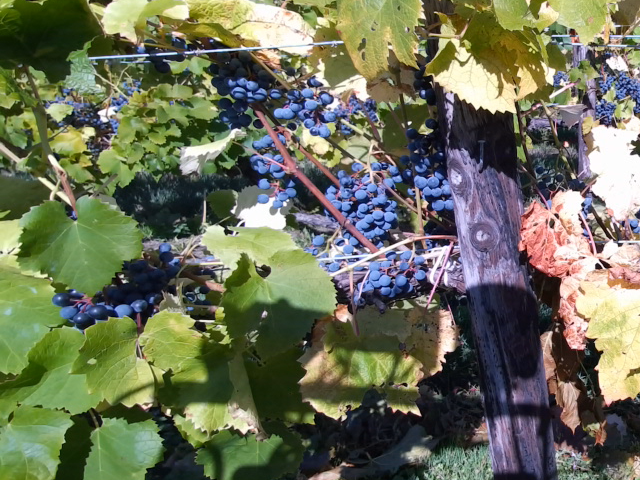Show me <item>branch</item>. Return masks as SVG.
<instances>
[{
	"mask_svg": "<svg viewBox=\"0 0 640 480\" xmlns=\"http://www.w3.org/2000/svg\"><path fill=\"white\" fill-rule=\"evenodd\" d=\"M399 109H400V113H401V116H402V120L404 122L403 129L407 130L409 128V120H408L407 113H406L405 106H404V94L403 93L399 94Z\"/></svg>",
	"mask_w": 640,
	"mask_h": 480,
	"instance_id": "5",
	"label": "branch"
},
{
	"mask_svg": "<svg viewBox=\"0 0 640 480\" xmlns=\"http://www.w3.org/2000/svg\"><path fill=\"white\" fill-rule=\"evenodd\" d=\"M338 123L352 132L360 140L364 141L367 145H369L370 142H373L374 147L377 146L379 148L383 157L390 165L396 166L398 164V161L391 156L386 145L381 140L372 136L368 137L366 134L362 133L355 125H352L350 122H348L345 118H340L338 120Z\"/></svg>",
	"mask_w": 640,
	"mask_h": 480,
	"instance_id": "2",
	"label": "branch"
},
{
	"mask_svg": "<svg viewBox=\"0 0 640 480\" xmlns=\"http://www.w3.org/2000/svg\"><path fill=\"white\" fill-rule=\"evenodd\" d=\"M182 275L184 277H187V278L191 279L192 281H195L196 283H200L202 285L209 286L212 289H214V290H216V291H218L220 293H223L225 291V288L222 285L218 284L217 282H214L213 280H211L209 278H204L202 276H198L197 274H194L193 272H191V271H189L187 269H184L182 271Z\"/></svg>",
	"mask_w": 640,
	"mask_h": 480,
	"instance_id": "4",
	"label": "branch"
},
{
	"mask_svg": "<svg viewBox=\"0 0 640 480\" xmlns=\"http://www.w3.org/2000/svg\"><path fill=\"white\" fill-rule=\"evenodd\" d=\"M413 196H414V203L416 205V210H415L416 230L418 232V235L420 237H423L425 235V229L423 227V222H422L423 202L421 200V193L418 188H415L413 190Z\"/></svg>",
	"mask_w": 640,
	"mask_h": 480,
	"instance_id": "3",
	"label": "branch"
},
{
	"mask_svg": "<svg viewBox=\"0 0 640 480\" xmlns=\"http://www.w3.org/2000/svg\"><path fill=\"white\" fill-rule=\"evenodd\" d=\"M251 109L254 115L256 116V118L260 121V124L265 128V130L270 135V138L272 140L274 147L276 148L278 153L282 156L290 173L295 178L302 181L309 188V190L315 195V197L320 201L322 206L326 208L328 211H330L332 214H334L340 223H343V227L346 229V231L349 234H351L355 238L362 241L365 247L372 254H376L378 252V249L371 243L368 237L362 234L360 231L354 229L350 225V223L347 221V219L344 217V215L339 211V209L327 201V199L322 195L320 190L312 183V181L307 176H305L304 174H302L297 170V168L294 166L293 161L291 160V157L289 156L287 151L284 149V147L281 145L276 131L273 129L272 125L267 121L266 117L269 118L275 124V126L281 131V133L286 137V139L289 142H291L319 171H321L333 183L335 187H338L340 185V181L335 177V175L325 165H323L307 148H305L303 144L295 136L291 134L288 128L279 120V118L276 115H274L265 106V104L262 101H259L257 105L253 104L251 106Z\"/></svg>",
	"mask_w": 640,
	"mask_h": 480,
	"instance_id": "1",
	"label": "branch"
}]
</instances>
